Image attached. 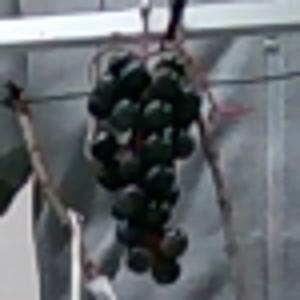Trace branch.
Returning a JSON list of instances; mask_svg holds the SVG:
<instances>
[{
  "label": "branch",
  "instance_id": "branch-1",
  "mask_svg": "<svg viewBox=\"0 0 300 300\" xmlns=\"http://www.w3.org/2000/svg\"><path fill=\"white\" fill-rule=\"evenodd\" d=\"M5 90L4 106L11 113V119L24 154L32 165L45 198V202L54 220L68 239L77 263L85 277L84 288L94 300H124L120 297L110 282L109 276L100 273L79 236L64 201L56 191L51 170L47 166L37 145L33 129L32 109L27 107L22 95L26 92L24 86L17 85L11 78L3 84Z\"/></svg>",
  "mask_w": 300,
  "mask_h": 300
},
{
  "label": "branch",
  "instance_id": "branch-2",
  "mask_svg": "<svg viewBox=\"0 0 300 300\" xmlns=\"http://www.w3.org/2000/svg\"><path fill=\"white\" fill-rule=\"evenodd\" d=\"M192 115L198 132V147L205 157L208 170H210L215 203L219 210V220L223 226V255L229 267L232 298L233 300H248L234 238L233 205L226 197V179L221 170V154L208 132L202 106Z\"/></svg>",
  "mask_w": 300,
  "mask_h": 300
},
{
  "label": "branch",
  "instance_id": "branch-3",
  "mask_svg": "<svg viewBox=\"0 0 300 300\" xmlns=\"http://www.w3.org/2000/svg\"><path fill=\"white\" fill-rule=\"evenodd\" d=\"M190 0H165L168 9L167 25L159 36V49L175 48L177 36L181 30Z\"/></svg>",
  "mask_w": 300,
  "mask_h": 300
}]
</instances>
